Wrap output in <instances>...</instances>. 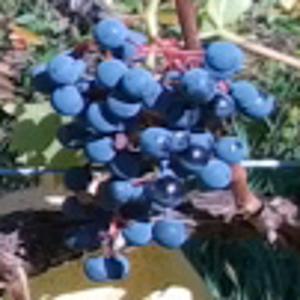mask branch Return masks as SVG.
<instances>
[{
	"instance_id": "obj_1",
	"label": "branch",
	"mask_w": 300,
	"mask_h": 300,
	"mask_svg": "<svg viewBox=\"0 0 300 300\" xmlns=\"http://www.w3.org/2000/svg\"><path fill=\"white\" fill-rule=\"evenodd\" d=\"M178 19L182 23L185 51H199L201 49L198 33V20L194 14L192 0H176Z\"/></svg>"
},
{
	"instance_id": "obj_2",
	"label": "branch",
	"mask_w": 300,
	"mask_h": 300,
	"mask_svg": "<svg viewBox=\"0 0 300 300\" xmlns=\"http://www.w3.org/2000/svg\"><path fill=\"white\" fill-rule=\"evenodd\" d=\"M230 170L235 174L232 185L233 202L238 209H244L251 202V194L246 173L244 172V165L242 163H232Z\"/></svg>"
}]
</instances>
